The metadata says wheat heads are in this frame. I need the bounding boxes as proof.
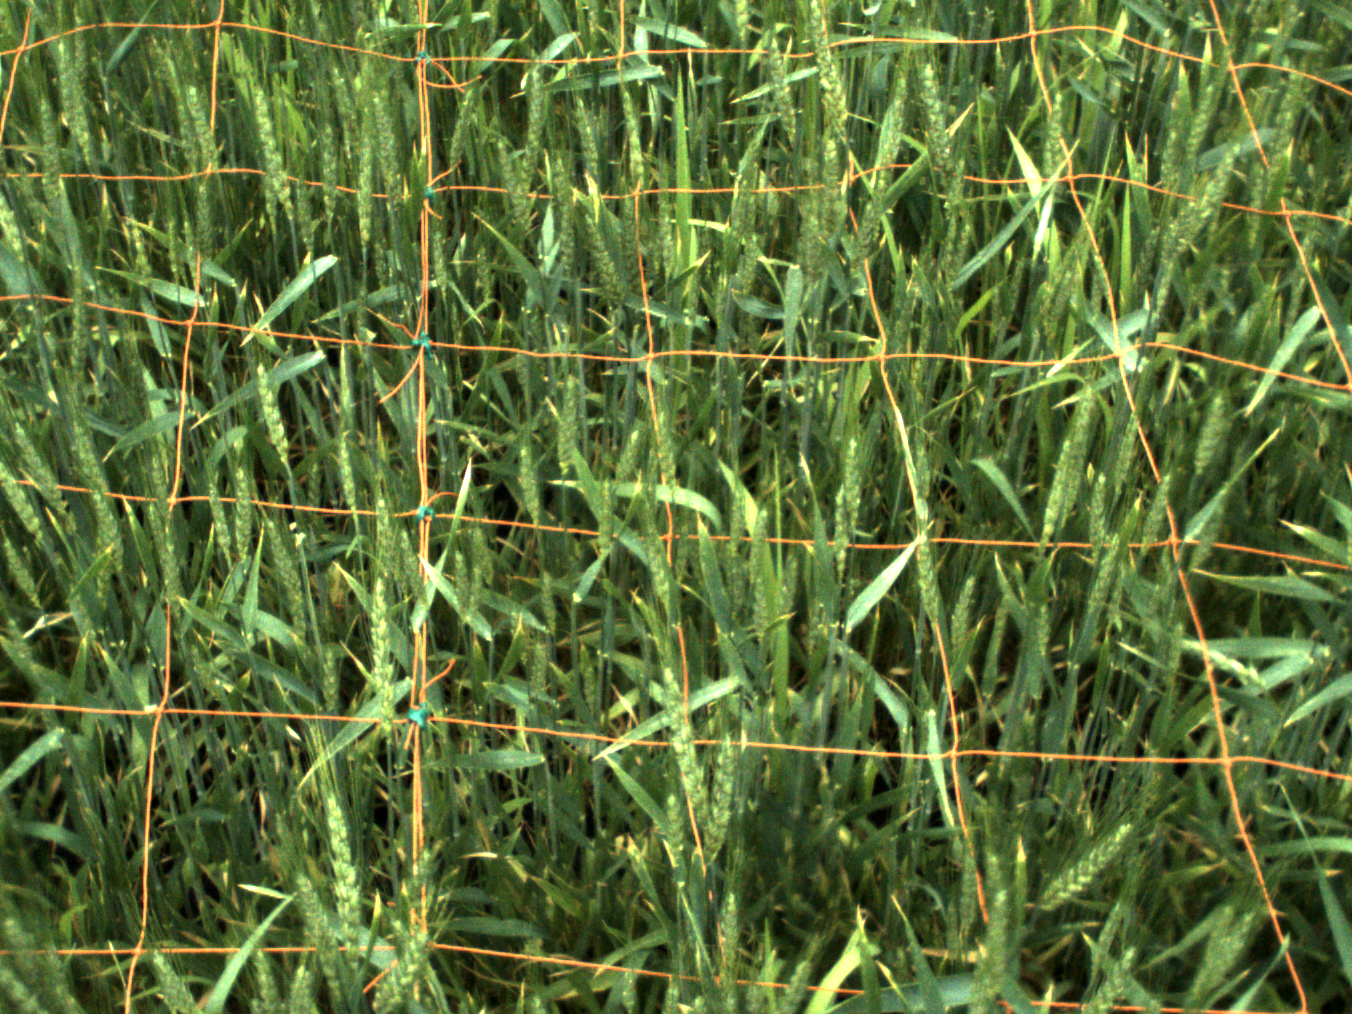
[66,580,98,642]
[940,213,960,267]
[376,495,410,593]
[1282,0,1302,38]
[1315,433,1345,493]
[945,157,966,222]
[467,565,485,615]
[1187,501,1225,569]
[1107,562,1128,618]
[12,418,67,514]
[1091,250,1114,305]
[233,460,253,561]
[656,409,677,487]
[920,61,957,167]
[1159,128,1179,185]
[451,545,470,610]
[105,285,131,328]
[285,963,315,1014]
[1062,383,1095,514]
[878,75,908,190]
[598,481,619,559]
[555,155,576,270]
[620,195,645,294]
[372,241,390,284]
[255,947,291,1014]
[1251,0,1281,32]
[48,980,87,1014]
[715,890,739,970]
[367,573,394,740]
[335,367,358,423]
[496,135,534,229]
[1292,232,1314,288]
[752,506,768,577]
[1026,0,1040,32]
[1129,224,1157,298]
[384,913,413,952]
[318,122,338,218]
[1039,822,1136,912]
[264,520,308,638]
[195,181,214,261]
[732,0,751,37]
[1093,900,1124,970]
[712,276,728,330]
[72,21,89,96]
[910,323,931,387]
[752,576,771,644]
[509,612,530,669]
[1086,469,1111,554]
[574,91,597,174]
[983,841,1006,895]
[407,0,421,26]
[1301,34,1333,97]
[315,645,341,713]
[263,159,279,223]
[96,551,117,606]
[528,991,561,1014]
[449,298,460,331]
[1193,398,1225,475]
[723,537,747,617]
[966,956,1007,1014]
[1086,534,1122,614]
[67,266,91,376]
[536,567,558,629]
[1198,145,1238,224]
[448,85,477,166]
[1141,472,1173,554]
[918,711,931,752]
[5,614,33,660]
[640,444,660,505]
[685,269,700,317]
[580,663,598,711]
[796,201,824,286]
[251,87,292,218]
[1041,438,1074,543]
[943,899,958,962]
[126,353,150,408]
[1187,84,1215,157]
[749,321,761,374]
[399,525,432,604]
[1206,895,1237,949]
[176,98,197,164]
[735,242,761,290]
[1262,71,1304,195]
[684,998,715,1014]
[314,908,345,997]
[130,223,153,278]
[895,285,916,348]
[1339,145,1352,225]
[164,215,180,277]
[72,419,109,492]
[986,292,1002,342]
[780,551,800,615]
[915,542,944,626]
[1078,942,1136,1014]
[804,612,819,646]
[1034,274,1083,327]
[752,960,814,1014]
[558,376,580,470]
[295,870,328,936]
[0,456,43,534]
[145,502,182,596]
[151,949,205,1014]
[700,731,736,864]
[1285,277,1306,333]
[1163,621,1184,673]
[91,488,125,569]
[739,988,769,1014]
[915,446,929,501]
[1090,266,1105,315]
[734,159,761,225]
[742,190,759,237]
[187,83,220,163]
[664,664,705,803]
[4,917,47,992]
[293,166,315,244]
[354,286,369,341]
[1007,253,1027,318]
[149,449,173,522]
[649,207,671,283]
[401,838,441,902]
[983,887,1012,962]
[0,159,21,250]
[529,643,546,692]
[1130,996,1163,1014]
[1340,469,1352,559]
[548,163,564,249]
[586,0,602,40]
[616,430,641,477]
[2,540,41,606]
[816,136,847,241]
[0,929,62,1014]
[373,89,404,219]
[1157,203,1199,265]
[1209,909,1253,988]
[472,523,495,582]
[730,487,747,547]
[431,227,449,293]
[843,437,861,514]
[738,137,762,176]
[191,648,228,704]
[510,350,530,390]
[621,88,645,174]
[929,0,947,16]
[357,106,373,246]
[655,988,680,1014]
[330,66,354,159]
[531,303,550,375]
[1190,936,1229,998]
[947,223,972,287]
[182,216,198,280]
[661,790,687,865]
[148,38,178,91]
[37,100,65,205]
[474,240,492,297]
[765,35,799,140]
[254,361,290,462]
[619,969,641,1011]
[302,463,321,515]
[503,66,543,215]
[207,479,231,550]
[56,41,95,158]
[1244,163,1265,248]
[515,447,542,521]
[370,929,429,1014]
[957,851,976,926]
[1151,261,1176,320]
[646,524,672,605]
[1035,599,1055,656]
[1113,412,1138,491]
[996,59,1007,104]
[579,213,623,306]
[852,201,875,260]
[809,0,850,124]
[833,481,850,570]
[674,523,689,580]
[948,576,977,647]
[1043,91,1066,179]
[993,596,1012,640]
[245,992,271,1014]
[336,428,357,506]
[323,785,360,974]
